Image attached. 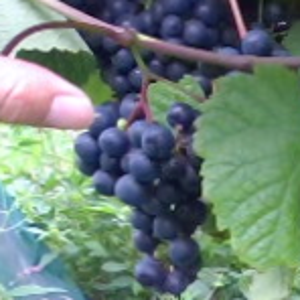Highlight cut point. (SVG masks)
<instances>
[{
    "instance_id": "cut-point-1",
    "label": "cut point",
    "mask_w": 300,
    "mask_h": 300,
    "mask_svg": "<svg viewBox=\"0 0 300 300\" xmlns=\"http://www.w3.org/2000/svg\"><path fill=\"white\" fill-rule=\"evenodd\" d=\"M129 49L132 51L139 68L144 73L141 77V95L143 97H146L148 95V80L158 81L163 84H166L168 82V78L166 76L152 73L150 68L146 65L145 61L143 60L139 48L135 44L130 45Z\"/></svg>"
}]
</instances>
